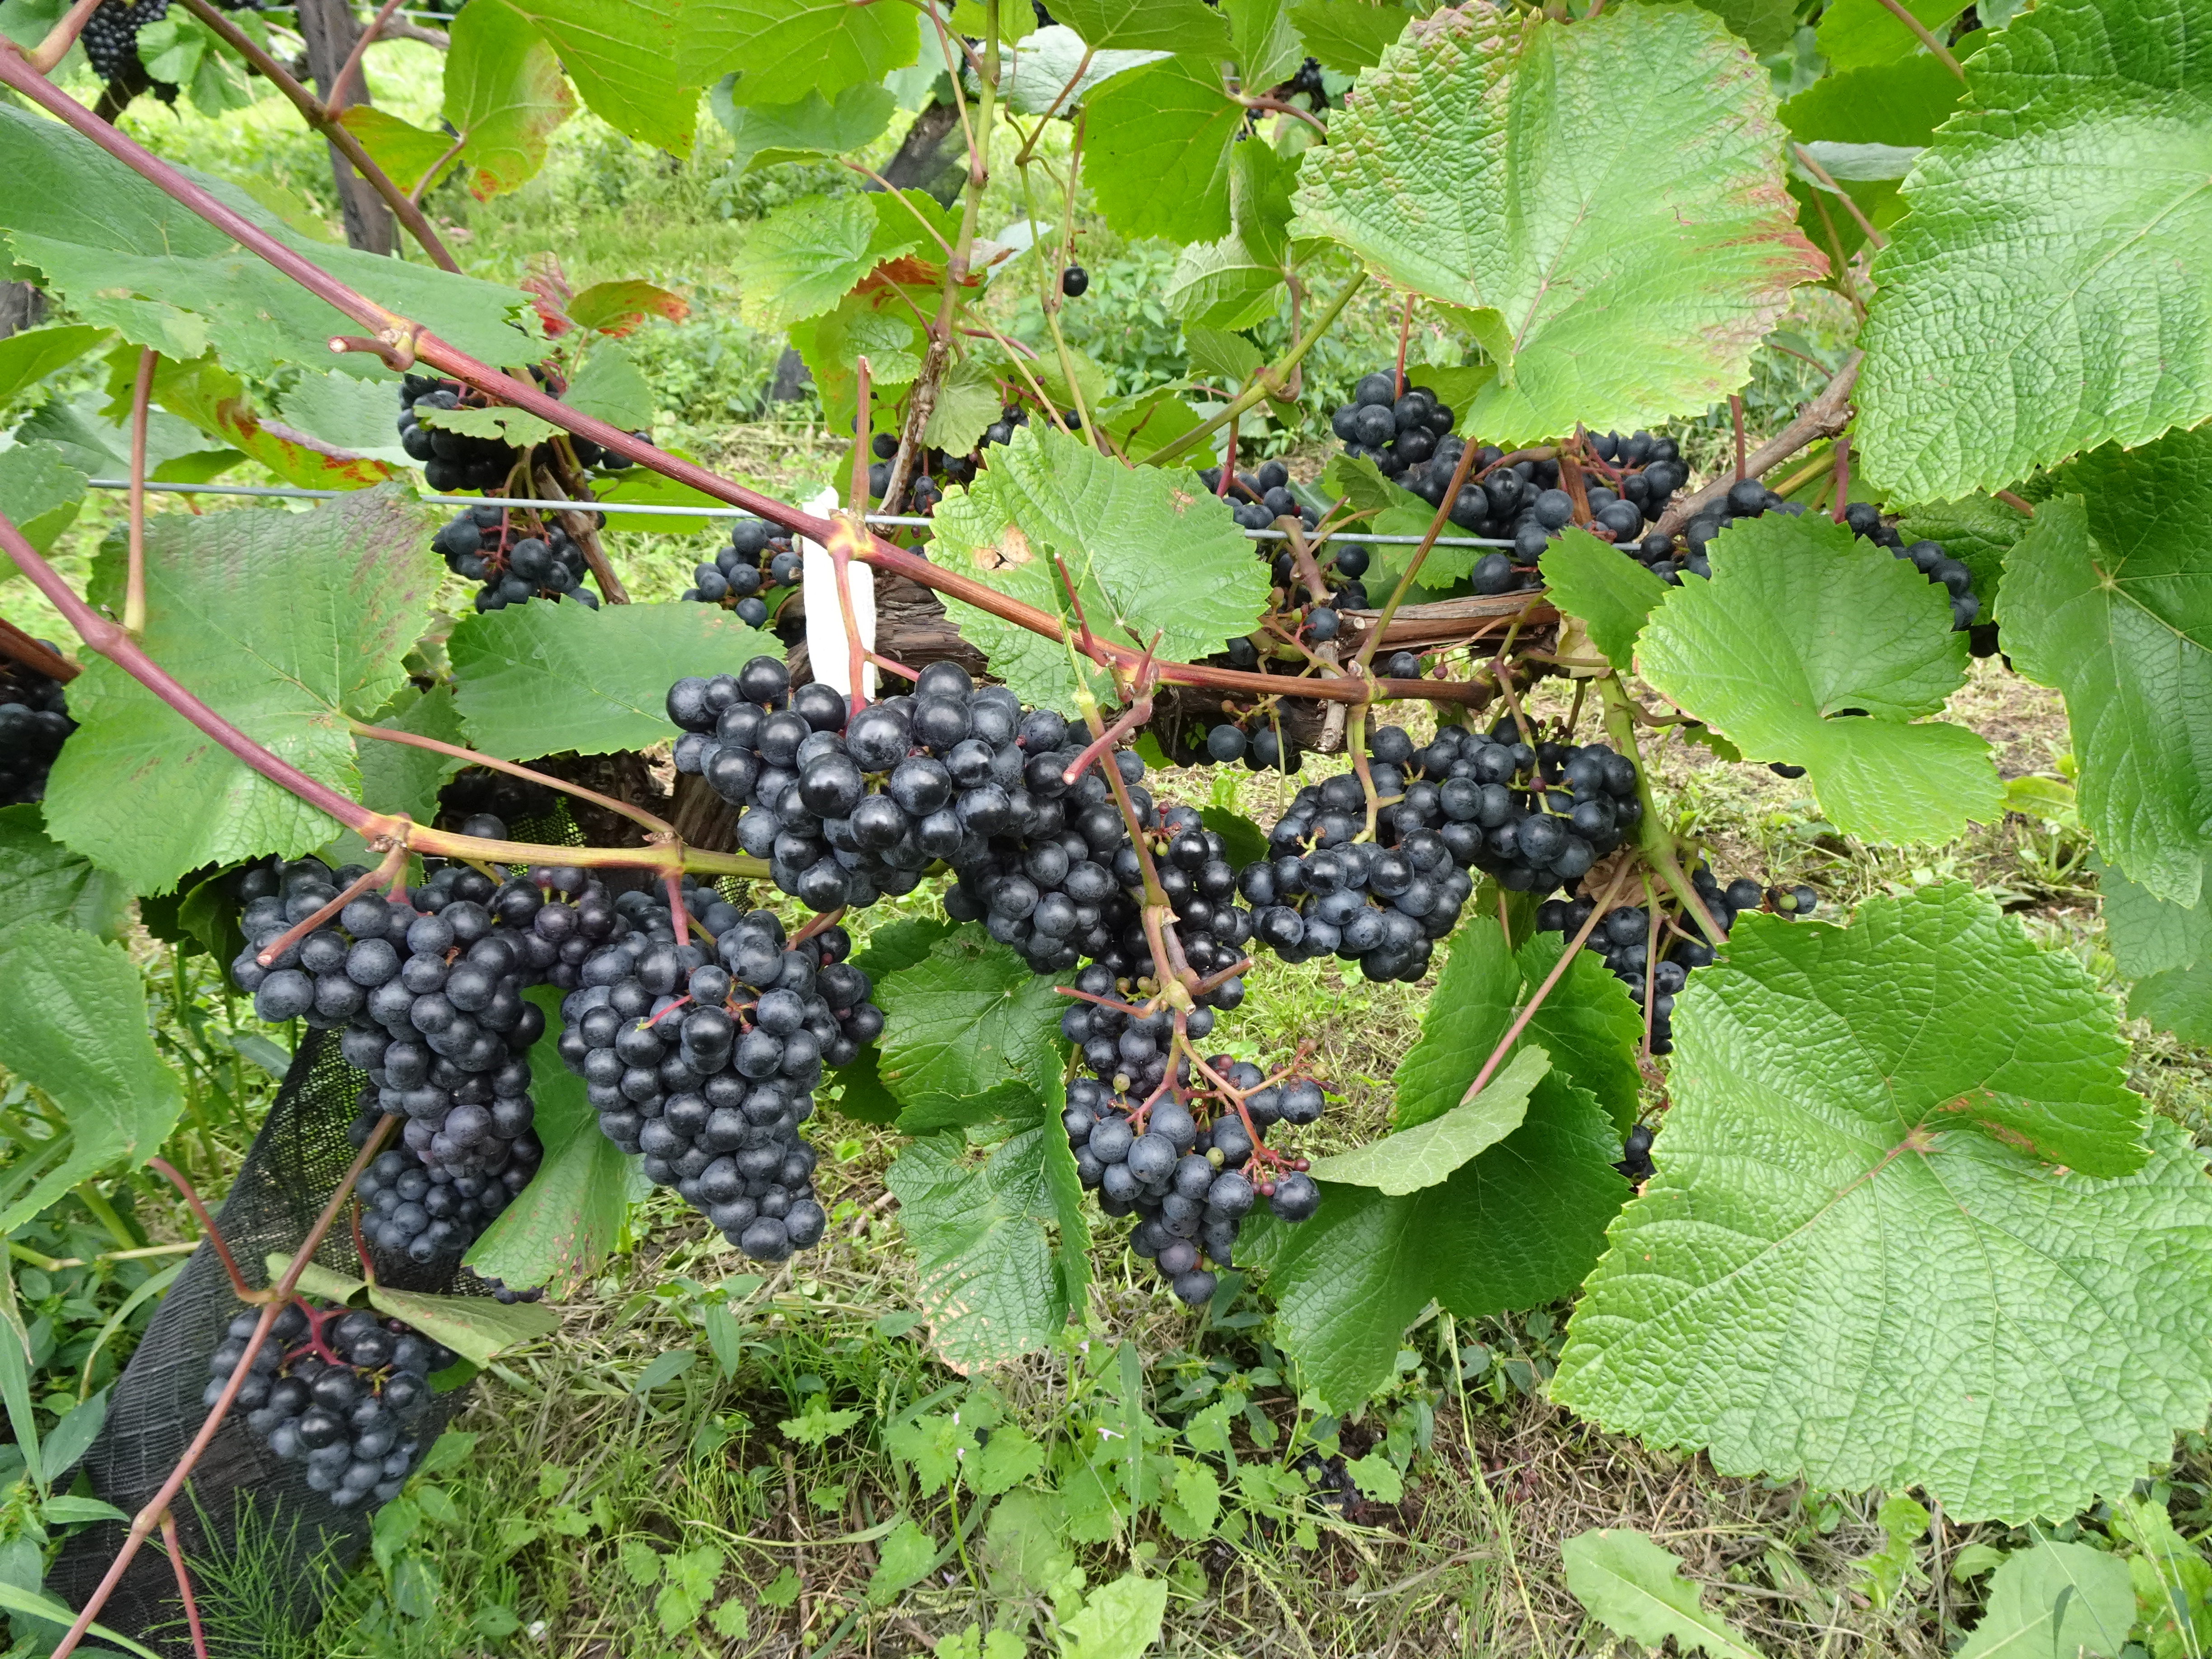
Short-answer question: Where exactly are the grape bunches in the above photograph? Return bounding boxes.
[1727,868,1817,922]
[1390,434,1544,538]
[1059,964,1244,1102]
[1198,460,1321,564]
[558,872,884,1262]
[851,391,1033,517]
[1168,712,1302,775]
[1332,368,1454,481]
[796,660,1026,913]
[431,505,606,615]
[1060,1053,1324,1305]
[1958,621,2014,673]
[1843,502,1979,633]
[680,519,803,631]
[521,864,616,988]
[1753,761,1806,778]
[1478,714,1638,895]
[1611,1126,1654,1178]
[1389,651,1447,678]
[231,813,545,1175]
[1237,725,1495,981]
[461,1265,554,1304]
[666,656,846,896]
[1062,265,1089,298]
[203,1297,460,1509]
[1536,851,1738,1054]
[1268,544,1370,612]
[1675,709,1703,728]
[0,639,79,807]
[1207,696,1292,763]
[1302,608,1340,642]
[1003,375,1083,430]
[1641,478,1809,587]
[1226,636,1259,666]
[945,711,1154,976]
[1471,486,1644,592]
[399,367,653,498]
[1092,805,1252,980]
[1527,429,1689,522]
[353,1125,543,1264]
